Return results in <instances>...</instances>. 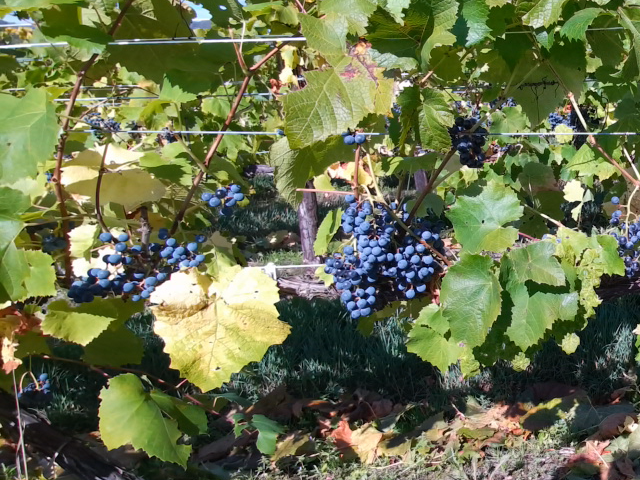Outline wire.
<instances>
[{
  "label": "wire",
  "instance_id": "obj_1",
  "mask_svg": "<svg viewBox=\"0 0 640 480\" xmlns=\"http://www.w3.org/2000/svg\"><path fill=\"white\" fill-rule=\"evenodd\" d=\"M305 36L291 37L290 34H272L262 33L256 34L255 37H229L224 39H212L206 37H175V38H137V39H116L107 43L108 47L123 45H148V44H164V45H188L193 43H210V44H226L231 42H302Z\"/></svg>",
  "mask_w": 640,
  "mask_h": 480
},
{
  "label": "wire",
  "instance_id": "obj_2",
  "mask_svg": "<svg viewBox=\"0 0 640 480\" xmlns=\"http://www.w3.org/2000/svg\"><path fill=\"white\" fill-rule=\"evenodd\" d=\"M70 134H104V135H130V134H142V135H168V134H193L202 136H275V131H226V130H214L204 131L195 129H166V130H145V129H128V130H106V129H70Z\"/></svg>",
  "mask_w": 640,
  "mask_h": 480
},
{
  "label": "wire",
  "instance_id": "obj_3",
  "mask_svg": "<svg viewBox=\"0 0 640 480\" xmlns=\"http://www.w3.org/2000/svg\"><path fill=\"white\" fill-rule=\"evenodd\" d=\"M479 136H493V135H518L526 137H545V136H613V137H640L639 132H625V131H543V132H528L520 130H490L479 131Z\"/></svg>",
  "mask_w": 640,
  "mask_h": 480
}]
</instances>
